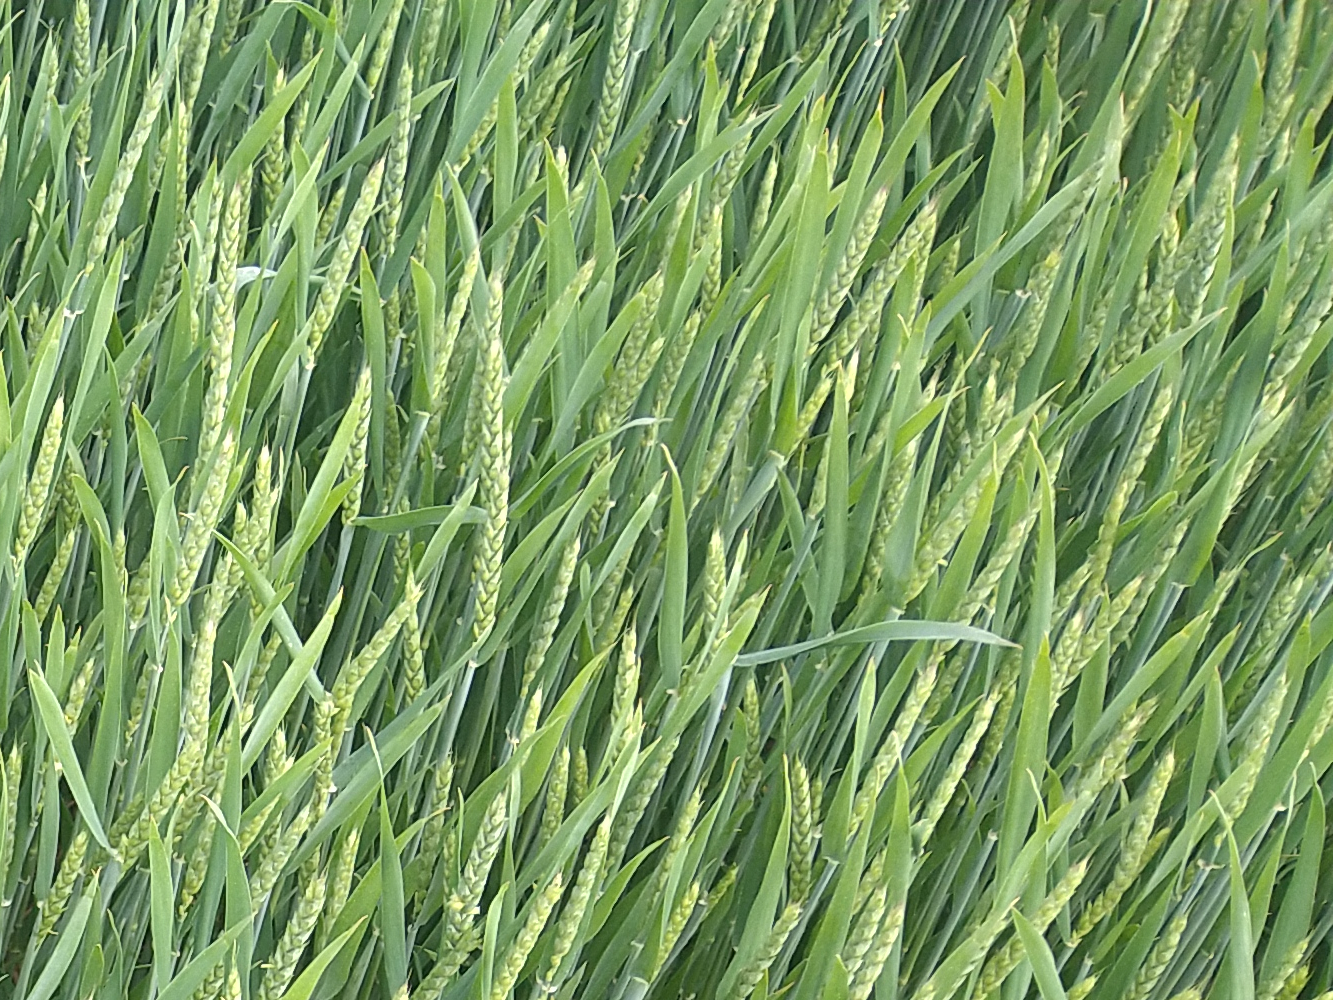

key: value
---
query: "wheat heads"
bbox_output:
[1113,203,1214,360]
[179,793,223,899]
[501,175,539,275]
[709,122,757,212]
[480,345,503,484]
[371,976,410,1000]
[822,204,936,370]
[211,189,245,365]
[189,352,237,480]
[617,627,637,723]
[610,344,667,431]
[1096,265,1147,393]
[385,295,398,377]
[1046,559,1092,634]
[121,741,208,859]
[1184,174,1234,325]
[917,379,938,410]
[596,590,635,660]
[863,821,931,889]
[149,199,203,316]
[1248,123,1289,237]
[732,446,747,522]
[1160,2,1212,112]
[919,427,1026,577]
[176,0,200,62]
[807,425,835,516]
[96,788,144,862]
[1230,578,1300,711]
[1214,675,1289,836]
[906,223,937,303]
[656,184,694,276]
[1123,388,1170,496]
[119,553,153,641]
[655,877,700,975]
[1066,578,1150,687]
[1275,224,1328,335]
[811,777,827,837]
[1240,412,1294,491]
[937,237,961,293]
[312,693,334,802]
[171,443,232,596]
[166,959,238,1000]
[805,193,887,346]
[247,628,284,705]
[55,659,93,780]
[778,378,833,456]
[181,0,219,109]
[924,615,984,722]
[602,278,662,424]
[574,747,594,803]
[468,439,513,633]
[918,689,998,836]
[340,380,370,522]
[384,386,405,502]
[543,745,569,838]
[84,65,171,264]
[610,740,682,864]
[463,279,503,460]
[1123,2,1179,117]
[263,70,285,214]
[1273,259,1333,374]
[1197,568,1237,636]
[18,183,43,282]
[2,749,21,860]
[969,2,1026,148]
[1148,72,1190,185]
[540,74,575,140]
[321,828,357,946]
[73,1,91,156]
[856,310,882,406]
[1114,916,1187,1000]
[811,886,887,1000]
[494,4,511,52]
[329,694,351,766]
[700,864,739,929]
[1046,614,1083,715]
[626,102,660,197]
[289,103,313,161]
[991,626,1029,691]
[18,394,67,558]
[1023,132,1053,207]
[1090,479,1127,576]
[702,0,733,54]
[252,448,270,575]
[234,792,280,854]
[442,821,457,898]
[1195,137,1239,222]
[1117,518,1189,656]
[743,677,768,786]
[923,396,1012,532]
[201,553,236,624]
[1310,546,1333,609]
[970,863,1087,1000]
[1031,449,1063,513]
[589,0,643,160]
[641,311,702,452]
[511,260,595,371]
[984,685,1016,768]
[179,573,224,732]
[996,405,1049,509]
[555,816,612,970]
[1205,0,1252,89]
[700,209,721,313]
[310,185,343,244]
[1119,173,1152,219]
[951,916,1008,997]
[788,757,812,903]
[194,185,222,306]
[645,787,703,904]
[1251,385,1286,431]
[418,224,425,269]
[595,559,626,637]
[1182,355,1244,466]
[1259,967,1309,1000]
[1268,402,1329,483]
[213,0,240,55]
[826,908,907,1000]
[400,571,429,700]
[329,587,416,701]
[379,58,413,248]
[364,0,401,92]
[305,25,315,64]
[751,158,780,254]
[727,592,762,637]
[456,22,548,165]
[251,876,327,1000]
[797,6,841,61]
[1298,692,1333,762]
[1099,697,1153,791]
[303,165,380,352]
[998,256,1056,391]
[107,360,137,436]
[733,904,800,1000]
[706,534,730,672]
[1293,429,1333,535]
[414,4,446,90]
[625,706,644,756]
[124,651,157,757]
[855,442,913,606]
[516,51,579,143]
[1125,752,1173,868]
[400,926,484,1000]
[520,688,539,746]
[33,824,90,945]
[390,496,413,596]
[1037,153,1110,260]
[731,0,784,109]
[262,726,289,788]
[1044,18,1059,77]
[998,975,1095,1000]
[252,800,313,905]
[57,455,83,530]
[871,389,901,460]
[1082,828,1173,936]
[944,358,972,457]
[976,378,994,445]
[406,762,448,909]
[1248,96,1291,157]
[848,667,944,835]
[1265,0,1302,122]
[490,874,565,1000]
[519,539,577,697]
[584,442,612,544]
[1250,939,1309,1000]
[23,43,60,179]
[31,530,77,622]
[232,503,253,590]
[946,515,1026,652]
[696,354,765,515]
[428,250,480,403]
[449,792,510,953]
[227,153,253,260]
[176,101,191,205]
[171,710,259,841]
